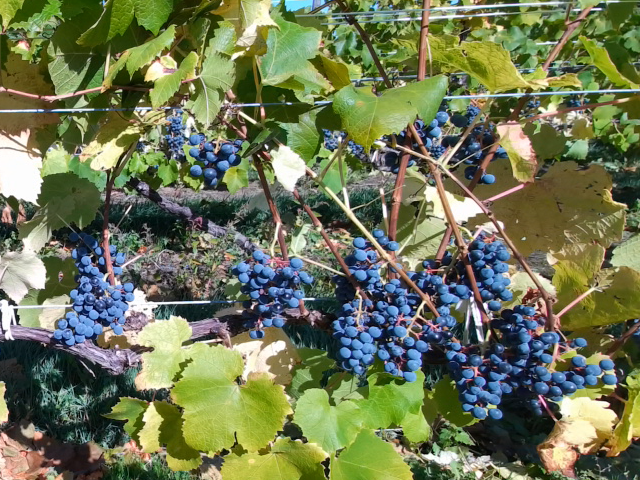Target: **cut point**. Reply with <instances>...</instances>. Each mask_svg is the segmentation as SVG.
<instances>
[{"mask_svg":"<svg viewBox=\"0 0 640 480\" xmlns=\"http://www.w3.org/2000/svg\"><path fill=\"white\" fill-rule=\"evenodd\" d=\"M425 305V301L422 300L421 305H419V307L415 311V315L413 316L412 321H416L418 319V316L421 314V310Z\"/></svg>","mask_w":640,"mask_h":480,"instance_id":"obj_1","label":"cut point"},{"mask_svg":"<svg viewBox=\"0 0 640 480\" xmlns=\"http://www.w3.org/2000/svg\"><path fill=\"white\" fill-rule=\"evenodd\" d=\"M485 331H486L487 335H486L485 339H484V340H483V342H482V345H483V346H487V345H488V343H489V342H490V340H491V335L489 334V331H488V328H487V326H486V325H485Z\"/></svg>","mask_w":640,"mask_h":480,"instance_id":"obj_2","label":"cut point"}]
</instances>
